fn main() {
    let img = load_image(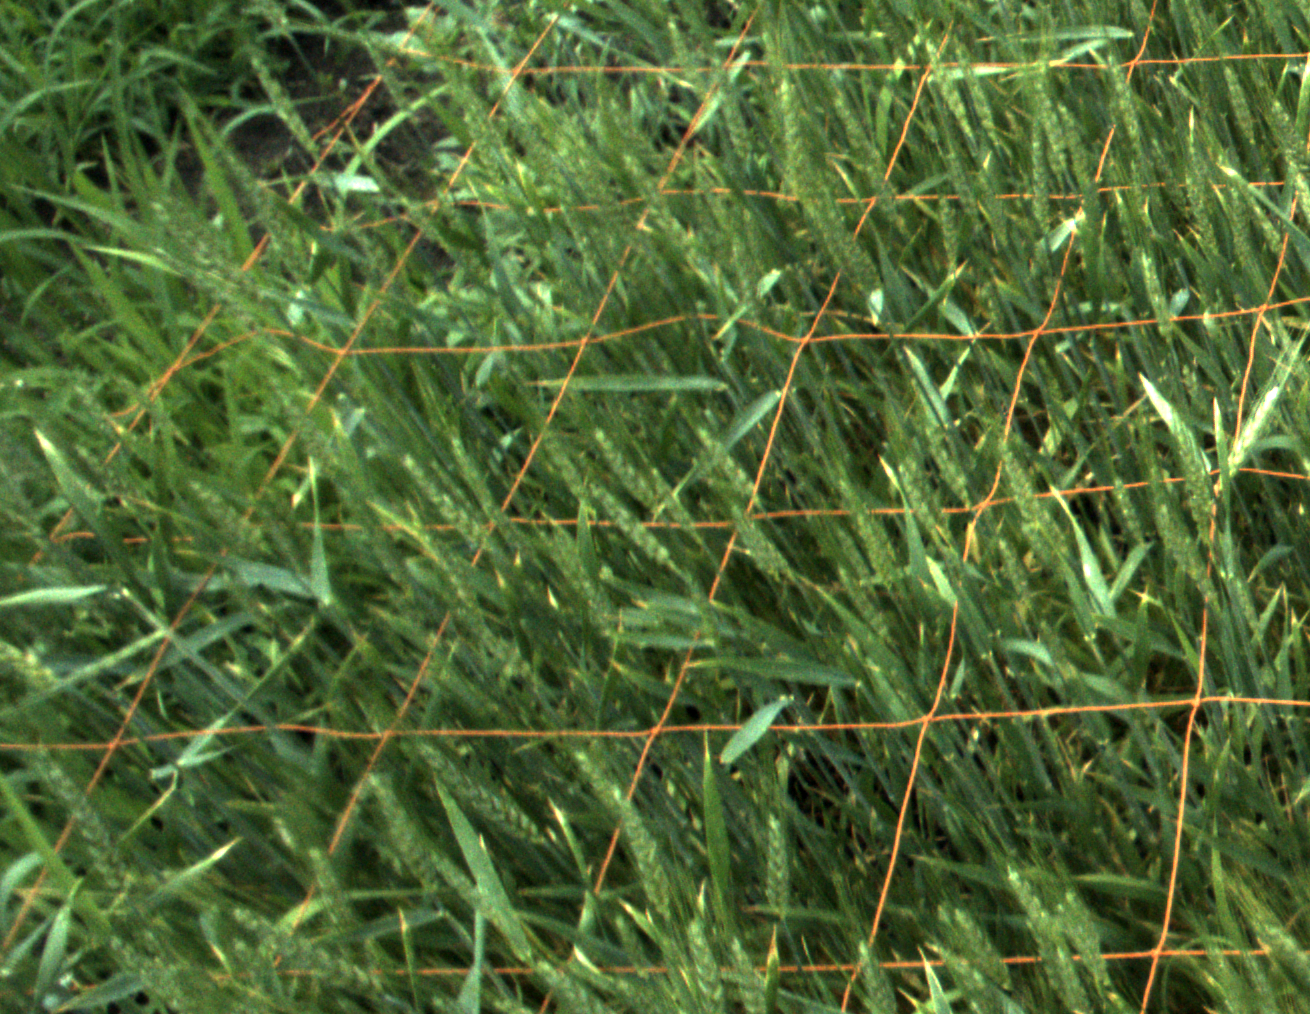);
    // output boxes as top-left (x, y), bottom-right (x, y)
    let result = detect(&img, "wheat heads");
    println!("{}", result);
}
top-left (952, 37), bottom-right (999, 145)
top-left (743, 535), bottom-right (782, 585)
top-left (780, 76), bottom-right (821, 207)
top-left (839, 566), bottom-right (892, 643)
top-left (150, 971), bottom-right (214, 1014)
top-left (902, 482), bottom-right (935, 534)
top-left (276, 398), bottom-right (353, 484)
top-left (1123, 0), bottom-right (1153, 31)
top-left (1056, 945), bottom-right (1097, 1014)
top-left (554, 146), bottom-right (661, 274)
top-left (1055, 102), bottom-right (1091, 182)
top-left (1182, 178), bottom-right (1216, 250)
top-left (851, 512), bottom-right (895, 590)
top-left (912, 71), bottom-right (936, 129)
top-left (731, 236), bottom-right (766, 333)
top-left (1214, 955), bottom-right (1282, 1014)
top-left (570, 749), bottom-right (617, 817)
top-left (1114, 475), bottom-right (1144, 541)
top-left (1242, 947), bottom-right (1278, 1007)
top-left (452, 593), bottom-right (490, 635)
top-left (145, 192), bottom-right (277, 305)
top-left (229, 935), bottom-right (266, 993)
top-left (682, 913), bottom-right (729, 1014)
top-left (223, 149), bottom-right (264, 206)
top-left (810, 201), bottom-right (882, 296)
top-left (440, 189), bottom-right (493, 283)
top-left (612, 912), bottom-right (653, 977)
top-left (106, 933), bottom-right (165, 995)
top-left (1056, 905), bottom-right (1106, 984)
top-left (291, 777), bottom-right (334, 815)
top-left (1139, 249), bottom-right (1169, 322)
top-left (479, 495), bottom-right (540, 556)
top-left (995, 435), bottom-right (1071, 567)
top-left (945, 957), bottom-right (1009, 1014)
top-left (975, 281), bottom-right (1005, 332)
top-left (1194, 271), bottom-right (1215, 313)
top-left (230, 903), bottom-right (384, 1008)
top-left (368, 771), bottom-right (441, 897)
top-left (553, 185), bottom-right (600, 273)
top-left (363, 36), bottom-right (412, 114)
top-left (573, 132), bottom-right (613, 187)
top-left (731, 503), bottom-right (793, 581)
top-left (1275, 317), bottom-right (1310, 384)
top-left (1040, 612), bottom-right (1069, 665)
top-left (1223, 179), bottom-right (1251, 260)
top-left (711, 56), bottom-right (755, 165)
top-left (1247, 189), bottom-right (1284, 252)
top-left (666, 19), bottom-right (706, 95)
top-left (732, 937), bottom-right (769, 1014)
top-left (857, 936), bottom-right (898, 1014)
top-left (943, 148), bottom-right (980, 233)
top-left (305, 844), bottom-right (350, 930)
top-left (757, 773), bottom-right (803, 825)
top-left (488, 637), bottom-right (535, 680)
top-left (698, 426), bottom-right (761, 500)
top-left (540, 427), bottom-right (590, 502)
top-left (1104, 0), bottom-right (1121, 25)
top-left (251, 502), bottom-right (304, 579)
top-left (1148, 139), bottom-right (1186, 218)
top-left (452, 437), bottom-right (497, 504)
top-left (152, 249), bottom-right (257, 328)
top-left (904, 455), bottom-right (955, 528)
top-left (837, 478), bottom-right (879, 522)
top-left (831, 93), bottom-right (889, 171)
top-left (356, 534), bottom-right (410, 589)
top-left (936, 193), bottom-right (962, 269)
top-left (1220, 62), bottom-right (1258, 147)
top-left (648, 460), bottom-right (702, 543)
top-left (591, 426), bottom-right (658, 506)
top-left (588, 225), bottom-right (616, 267)
top-left (924, 33), bottom-right (974, 142)
top-left (363, 933), bottom-right (399, 993)
top-left (1158, 503), bottom-right (1218, 612)
top-left (353, 224), bottom-right (390, 272)
top-left (251, 57), bottom-right (321, 155)
top-left (73, 381), bottom-right (119, 440)
top-left (1261, 84), bottom-right (1310, 180)
top-left (759, 26), bottom-right (790, 83)
top-left (1266, 929), bottom-right (1310, 1014)
top-left (622, 155), bottom-right (705, 269)
top-left (218, 0), bottom-right (291, 35)
top-left (253, 179), bottom-right (313, 286)
top-left (262, 483), bottom-right (316, 554)
top-left (599, 487), bottom-right (669, 561)
top-left (604, 95), bottom-right (670, 171)
top-left (1025, 139), bottom-right (1052, 235)
top-left (1230, 571), bottom-right (1263, 637)
top-left (1183, 124), bottom-right (1209, 179)
top-left (418, 525), bottom-right (478, 609)
top-left (409, 203), bottom-right (465, 259)
top-left (219, 796), bottom-right (281, 816)
top-left (1215, 384), bottom-right (1282, 494)
top-left (455, 76), bottom-right (518, 185)
top-left (1005, 862), bottom-right (1069, 950)
top-left (867, 0), bottom-right (913, 65)
top-left (430, 994), bottom-right (490, 1014)
top-left (863, 163), bottom-right (896, 225)
top-left (70, 440), bottom-right (146, 501)
top-left (1031, 76), bottom-right (1069, 166)
top-left (1036, 355), bottom-right (1061, 403)
top-left (0, 640), bottom-right (62, 690)
top-left (1212, 283), bottom-right (1233, 325)
top-left (400, 448), bottom-right (499, 554)
top-left (429, 456), bottom-right (477, 512)
top-left (186, 481), bottom-right (276, 567)
top-left (525, 0), bottom-right (546, 26)
top-left (1181, 0), bottom-right (1206, 42)
top-left (1281, 0), bottom-right (1310, 28)
top-left (502, 101), bottom-right (554, 170)
top-left (764, 814), bottom-right (792, 924)
top-left (1286, 159), bottom-right (1310, 250)
top-left (924, 426), bottom-right (971, 506)
top-left (1104, 53), bottom-right (1139, 163)
top-left (996, 537), bottom-right (1026, 593)
top-left (1065, 892), bottom-right (1099, 945)
top-left (550, 528), bottom-right (610, 606)
top-left (528, 956), bottom-right (674, 1014)
top-left (952, 905), bottom-right (1011, 982)
top-left (1188, 491), bottom-right (1206, 541)
top-left (427, 844), bottom-right (493, 919)
top-left (1022, 916), bottom-right (1069, 999)
top-left (970, 168), bottom-right (1007, 244)
top-left (416, 739), bottom-right (549, 849)
top-left (616, 798), bottom-right (672, 919)
top-left (1172, 427), bottom-right (1219, 513)
top-left (39, 763), bottom-right (128, 887)
top-left (539, 531), bottom-right (587, 598)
